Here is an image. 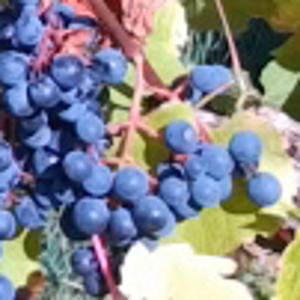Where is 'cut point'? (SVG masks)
Segmentation results:
<instances>
[{
	"instance_id": "1",
	"label": "cut point",
	"mask_w": 300,
	"mask_h": 300,
	"mask_svg": "<svg viewBox=\"0 0 300 300\" xmlns=\"http://www.w3.org/2000/svg\"><path fill=\"white\" fill-rule=\"evenodd\" d=\"M143 65H144V59L142 57H139L136 62L137 79L135 84L133 106L132 109L130 110L128 121H121L120 123L108 124L106 126V129L109 131V134L111 136H115L118 132L127 131V138L125 140V145L122 150V155L124 157H127L130 153L132 143L134 141L135 128L140 131L149 133L155 139H158L160 137V134L153 127L138 122L141 95H142V86L144 82L143 79L144 73L142 72Z\"/></svg>"
}]
</instances>
